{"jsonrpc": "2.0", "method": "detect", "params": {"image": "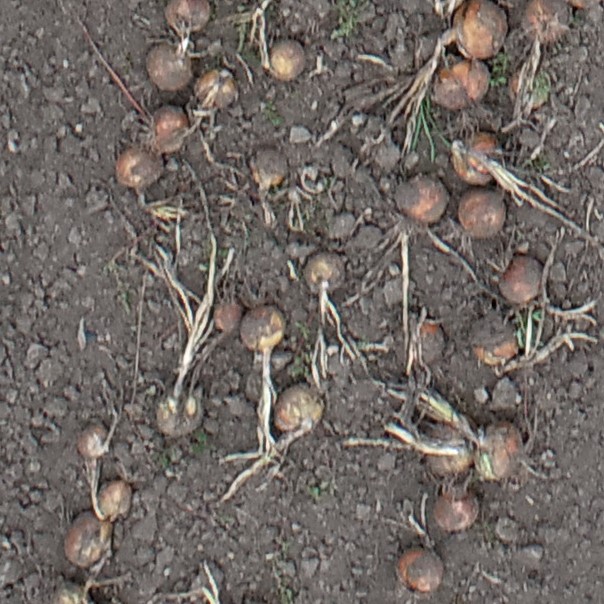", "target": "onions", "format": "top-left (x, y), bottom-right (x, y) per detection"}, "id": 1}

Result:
top-left (520, 3), bottom-right (569, 45)
top-left (425, 442), bottom-right (470, 483)
top-left (497, 255), bottom-right (540, 303)
top-left (165, 1), bottom-right (208, 33)
top-left (265, 38), bottom-right (303, 79)
top-left (93, 482), bottom-right (131, 518)
top-left (77, 428), bottom-right (106, 460)
top-left (213, 300), bottom-right (242, 331)
top-left (431, 490), bottom-right (476, 532)
top-left (509, 73), bottom-right (544, 104)
top-left (434, 59), bottom-right (487, 109)
top-left (411, 318), bottom-right (445, 359)
top-left (454, 3), bottom-right (509, 58)
top-left (236, 309), bottom-right (284, 351)
top-left (450, 137), bottom-right (495, 185)
top-left (155, 390), bottom-right (203, 436)
top-left (473, 423), bottom-right (524, 479)
top-left (194, 71), bottom-right (234, 109)
top-left (144, 43), bottom-right (191, 92)
top-left (248, 147), bottom-right (288, 190)
top-left (393, 547), bottom-right (443, 593)
top-left (395, 177), bottom-right (447, 225)
top-left (42, 577), bottom-right (89, 604)
top-left (274, 386), bottom-right (324, 434)
top-left (62, 517), bottom-right (111, 566)
top-left (149, 104), bottom-right (189, 151)
top-left (304, 254), bottom-right (340, 284)
top-left (113, 145), bottom-right (162, 189)
top-left (471, 338), bottom-right (519, 367)
top-left (456, 190), bottom-right (504, 236)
